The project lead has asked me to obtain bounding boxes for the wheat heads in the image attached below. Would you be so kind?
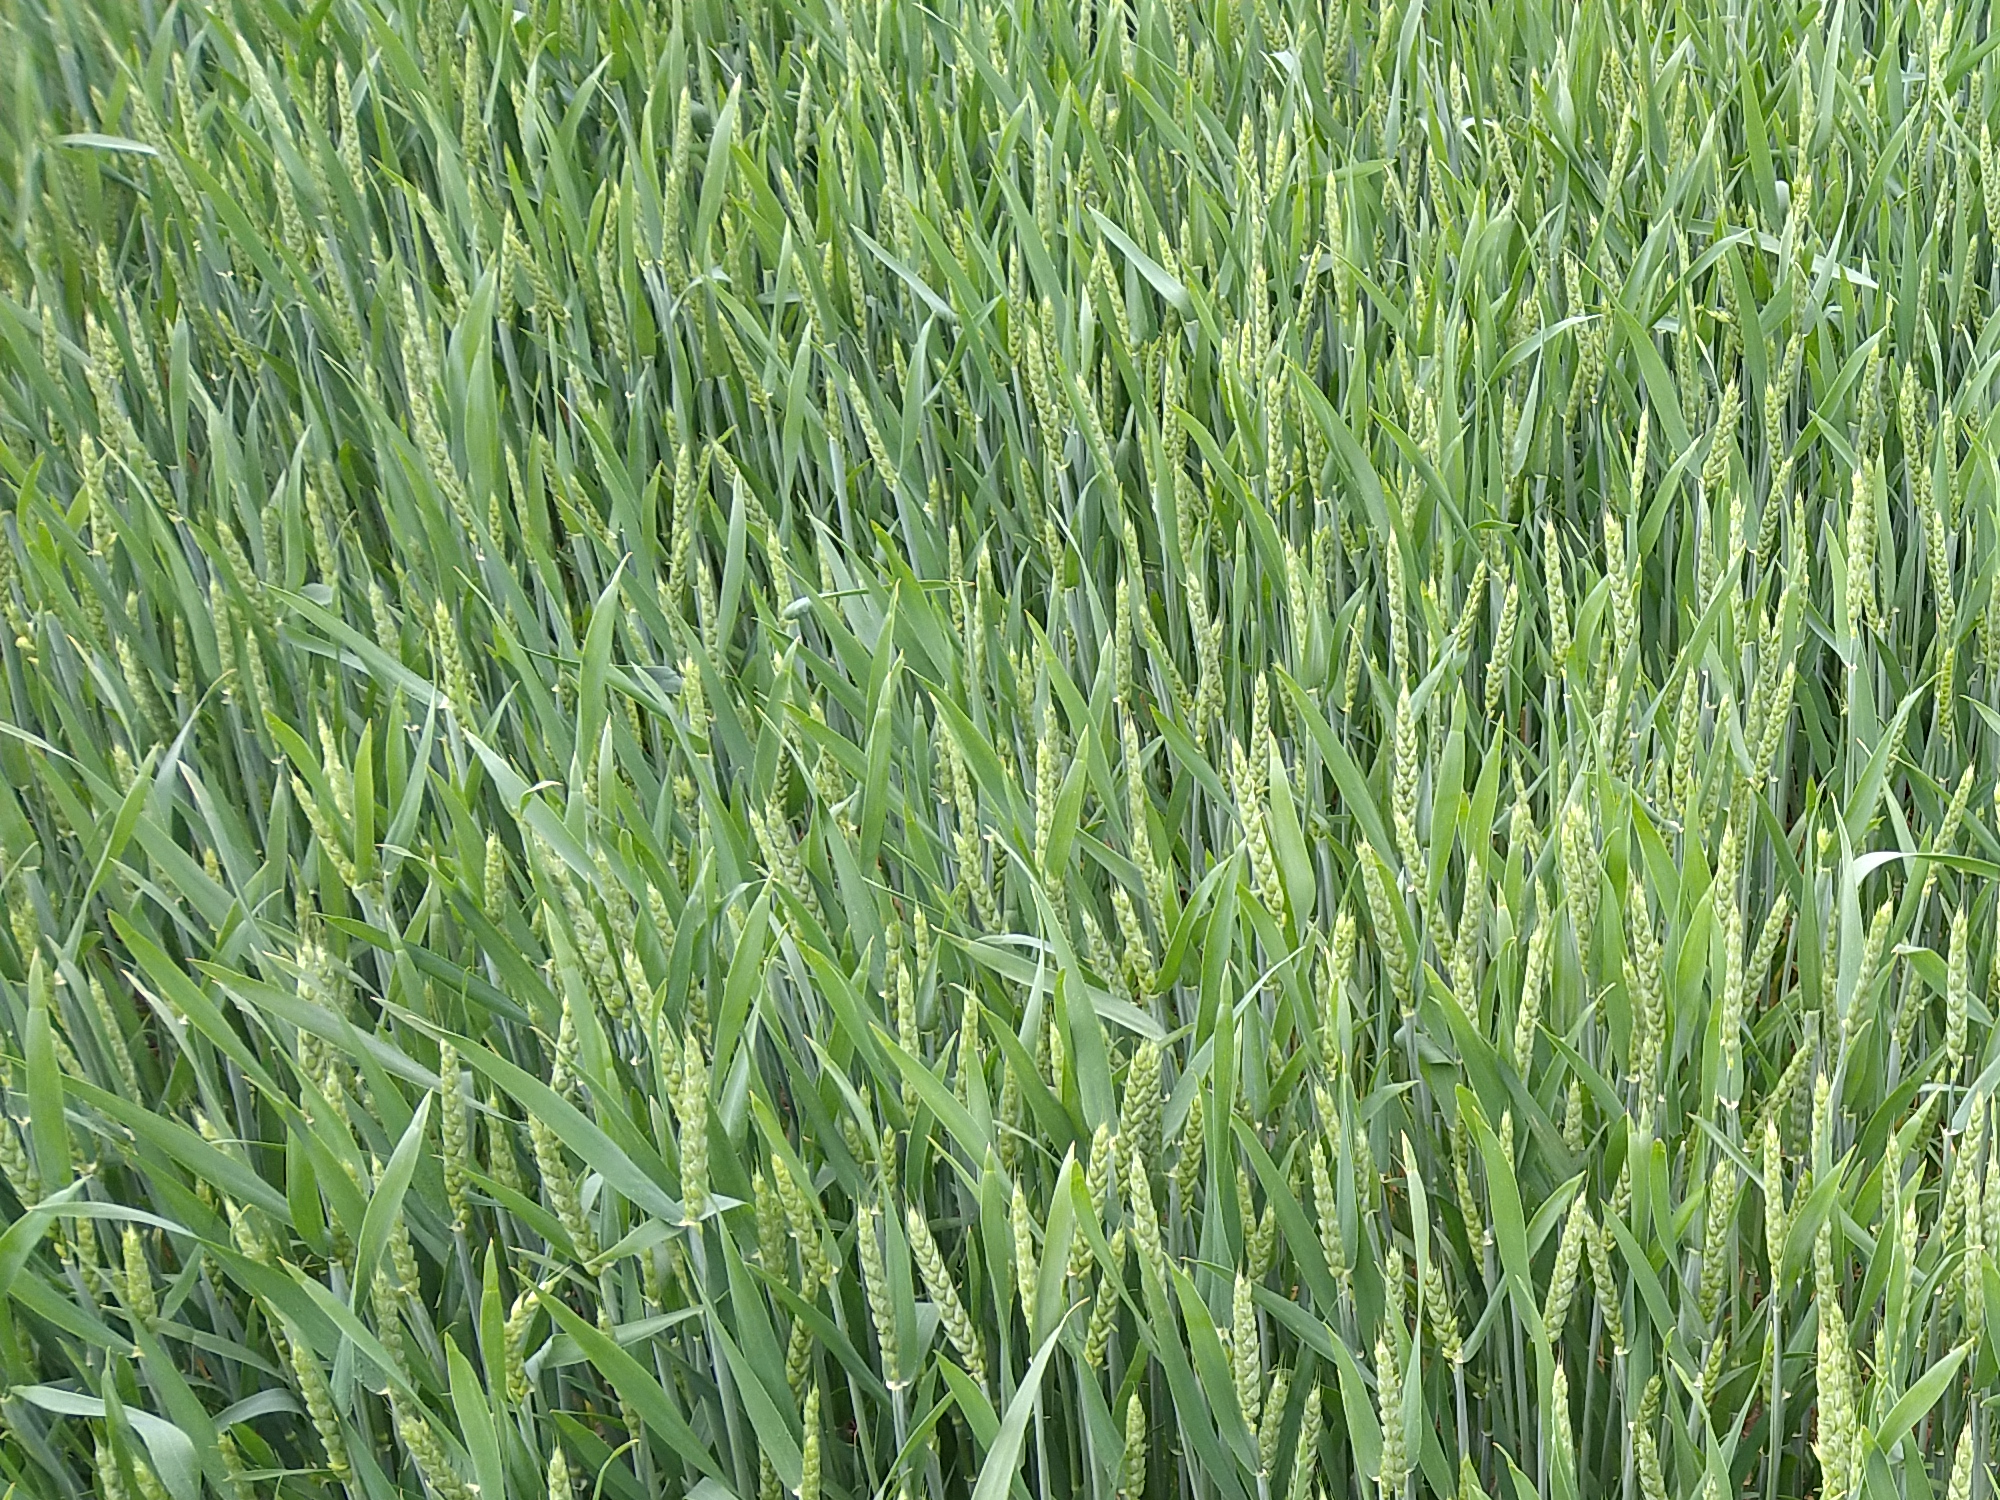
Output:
[1954,234,1978,334]
[845,1114,865,1169]
[103,160,118,256]
[571,945,602,1030]
[1588,977,1606,1026]
[1322,0,1341,93]
[1552,1365,1573,1480]
[128,587,137,634]
[1128,159,1144,251]
[1267,1040,1291,1111]
[1699,1334,1727,1404]
[13,151,24,203]
[996,94,1011,128]
[1714,154,1725,215]
[885,126,930,270]
[1534,194,1546,267]
[1114,577,1130,699]
[1697,375,1708,430]
[372,232,407,347]
[1319,979,1341,1075]
[1485,581,1520,710]
[392,560,437,632]
[914,93,933,158]
[940,107,968,187]
[48,1023,96,1106]
[25,287,39,349]
[1821,191,1831,240]
[89,87,153,234]
[1101,1024,1122,1069]
[895,962,919,1120]
[1968,72,1981,147]
[1125,715,1154,855]
[1169,35,1189,135]
[1413,874,1451,979]
[660,170,685,262]
[1039,300,1075,425]
[1934,142,1944,189]
[983,5,1005,74]
[1857,344,1879,409]
[603,199,619,269]
[1848,897,1898,1032]
[1993,840,2000,1003]
[1553,41,1565,79]
[1881,567,1884,608]
[315,234,362,364]
[1793,173,1802,202]
[926,476,941,526]
[1283,1389,1324,1500]
[1237,113,1257,185]
[1508,917,1551,1084]
[543,853,640,1040]
[1763,334,1775,383]
[1186,570,1228,709]
[1078,82,1104,200]
[1216,1329,1238,1366]
[1049,1021,1063,1090]
[1863,470,1880,626]
[1812,827,1833,856]
[49,590,80,637]
[1313,962,1331,1024]
[1913,0,1937,51]
[134,1458,207,1500]
[1084,252,1101,317]
[1785,1167,1813,1228]
[1737,806,1747,902]
[504,444,532,543]
[1579,819,1609,917]
[1636,1431,1675,1500]
[1192,687,1209,745]
[73,1186,103,1313]
[479,119,495,164]
[370,1269,416,1420]
[955,2,971,87]
[1633,1380,1662,1463]
[237,33,293,135]
[320,1033,368,1105]
[1913,261,1929,355]
[1427,234,1437,269]
[1664,274,1683,357]
[1653,762,1673,852]
[1316,1088,1342,1153]
[892,337,910,398]
[317,712,356,824]
[503,563,519,631]
[1530,73,1553,182]
[1145,158,1159,216]
[699,445,711,519]
[1721,915,1740,1059]
[1254,1376,1290,1473]
[569,362,599,421]
[642,1242,653,1301]
[1790,177,1812,259]
[1633,408,1648,511]
[535,433,566,517]
[1375,1340,1408,1484]
[489,493,506,557]
[1759,1317,1773,1409]
[1737,890,1791,1011]
[1172,1091,1206,1213]
[1539,1188,1585,1337]
[121,283,163,425]
[713,443,783,533]
[1807,233,1824,254]
[1933,1428,1977,1500]
[598,849,635,971]
[285,410,340,522]
[1608,211,1637,246]
[1412,279,1427,338]
[1489,537,1509,578]
[434,603,470,740]
[1297,22,1308,49]
[917,263,931,282]
[886,925,901,1036]
[1305,1142,1346,1284]
[1284,382,1305,497]
[1512,405,1522,434]
[1210,76,1227,124]
[1522,272,1547,337]
[308,56,330,173]
[1897,1207,1919,1367]
[1939,649,1955,736]
[570,472,607,541]
[1213,744,1232,800]
[1713,245,1746,350]
[1162,358,1187,464]
[1980,125,1999,232]
[1764,386,1780,477]
[1958,162,1969,212]
[1562,364,1582,434]
[1828,1303,1851,1354]
[1933,177,1948,220]
[1755,458,1793,567]
[1514,757,1536,834]
[1182,475,1224,550]
[1722,329,1738,382]
[1993,573,2000,679]
[1871,1332,1891,1419]
[1669,445,1685,477]
[1298,541,1307,564]
[1630,873,1668,1039]
[1843,470,1864,624]
[1866,86,1876,185]
[87,315,120,450]
[551,995,583,1142]
[1427,62,1436,82]
[842,0,855,32]
[1425,146,1449,227]
[513,235,568,309]
[8,603,46,669]
[596,252,629,375]
[1021,653,1031,693]
[1373,175,1395,262]
[1062,1122,1110,1277]
[324,172,348,237]
[1644,1030,1673,1125]
[113,745,137,790]
[760,1438,782,1500]
[1590,625,1608,691]
[1358,840,1407,1007]
[990,836,1004,914]
[41,122,91,225]
[1203,235,1220,289]
[1608,103,1631,194]
[1138,423,1155,509]
[1486,164,1503,207]
[856,1205,904,1378]
[96,1442,150,1500]
[0,538,26,610]
[1035,128,1056,245]
[11,905,58,1008]
[1983,1163,2000,1256]
[800,1392,822,1500]
[963,541,991,694]
[526,907,547,939]
[1920,424,1938,468]
[1147,337,1168,412]
[1237,324,1255,408]
[1968,402,1981,431]
[1604,1153,1634,1238]
[224,156,269,241]
[196,1110,241,1156]
[868,57,917,149]
[782,166,818,249]
[363,362,379,400]
[1286,544,1306,658]
[72,106,86,177]
[1694,1162,1735,1325]
[1897,364,1923,508]
[1512,341,1525,411]
[1009,244,1022,359]
[1269,131,1292,195]
[173,617,194,696]
[401,283,437,406]
[788,703,801,757]
[1932,763,1973,870]
[87,372,179,510]
[1014,683,1046,780]
[716,306,766,416]
[644,1,657,80]
[549,1449,576,1500]
[749,0,762,43]
[205,848,227,932]
[1018,458,1044,537]
[329,1165,360,1280]
[669,528,693,602]
[1835,62,1861,145]
[771,693,789,819]
[248,628,274,732]
[1334,911,1355,985]
[1794,492,1811,584]
[1191,52,1202,93]
[427,315,441,372]
[735,701,755,743]
[1310,526,1327,606]
[1000,587,1010,638]
[1253,0,1288,53]
[341,962,358,1025]
[797,45,818,158]
[531,251,550,335]
[1394,811,1431,901]
[461,36,480,169]
[1393,336,1413,402]
[752,810,787,903]
[1426,396,1442,467]
[97,245,122,381]
[792,251,822,337]
[413,10,440,102]
[897,254,911,329]
[1791,1045,1818,1152]
[1600,679,1622,779]
[1345,603,1367,708]
[1939,1105,1985,1242]
[1969,288,1986,337]
[666,407,683,461]
[498,207,517,319]
[846,371,895,489]
[1630,247,1639,270]
[227,1200,264,1268]
[511,78,530,155]
[1077,0,1091,59]
[1933,508,1954,623]
[1750,679,1789,783]
[291,772,357,884]
[1503,395,1517,507]
[1763,1119,1784,1284]
[952,755,978,857]
[1582,380,1592,408]
[1668,80,1689,175]
[1494,125,1521,190]
[660,256,705,344]
[1456,1159,1490,1269]
[675,777,700,905]
[1235,1278,1262,1423]
[1809,19,1824,32]
[937,359,976,433]
[1590,327,1618,428]
[1536,880,1547,921]
[1220,339,1235,363]
[441,1039,470,1214]
[320,11,335,50]
[671,1238,684,1287]
[1630,6,1649,85]
[231,96,262,183]
[487,1097,524,1188]
[1158,144,1176,223]
[1026,326,1068,462]
[413,424,479,543]
[16,1316,41,1378]
[219,313,257,370]
[1255,267,1267,377]
[249,0,285,60]
[1813,1220,1834,1337]
[1819,1336,1853,1500]
[1086,1231,1126,1366]
[1326,170,1346,311]
[100,322,125,376]
[1813,974,1841,1075]
[377,1163,422,1291]
[1682,1108,1700,1198]
[1564,1077,1586,1158]
[1730,499,1746,636]
[214,523,284,629]
[372,848,383,890]
[837,119,853,205]
[949,524,966,643]
[1402,480,1425,534]
[529,25,548,102]
[128,88,204,217]
[427,0,470,97]
[629,207,653,269]
[1011,648,1019,688]
[1457,323,1470,384]
[1610,51,1625,126]
[285,76,310,109]
[1374,79,1389,120]
[1850,1428,1867,1500]
[401,330,434,430]
[965,850,1012,931]
[0,851,27,916]
[484,829,506,917]
[1182,122,1216,172]
[466,177,489,267]
[1226,25,1235,65]
[951,224,969,310]
[1798,56,1813,181]
[399,1420,494,1500]
[1626,958,1642,1078]
[1759,611,1777,717]
[1225,744,1287,928]
[1371,6,1392,70]
[1227,0,1249,43]
[501,1284,557,1402]
[1683,141,1696,169]
[231,230,255,304]
[1598,47,1617,128]
[879,1121,898,1206]
[1910,1094,1941,1167]
[1587,216,1630,299]
[1116,8,1136,93]
[1451,60,1461,116]
[1259,1204,1276,1289]
[1332,94,1344,125]
[1942,407,1960,527]
[123,1227,158,1336]
[818,537,835,606]
[572,255,609,359]
[1116,1045,1165,1195]
[1066,620,1080,676]
[873,186,889,271]
[1431,724,1439,775]
[1325,534,1337,600]
[856,1082,871,1120]
[1543,931,1556,980]
[1037,865,1071,943]
[1406,120,1425,210]
[955,989,978,1110]
[1175,485,1193,566]
[775,333,787,380]
[1125,521,1152,601]
[629,190,655,245]
[1170,1,1187,45]
[368,23,414,115]
[646,881,706,1040]
[1236,1168,1256,1256]
[1075,374,1116,478]
[925,164,954,251]
[1435,305,1447,389]
[1938,1263,1969,1325]
[1822,906,1842,983]
[776,1266,824,1385]
[294,943,321,1081]
[1928,35,1939,103]
[322,1067,346,1138]
[1296,245,1323,346]
[751,1174,791,1293]
[980,100,989,131]
[1656,52,1665,111]
[1449,857,1485,971]
[84,8,111,74]
[1128,853,1171,945]
[1964,1186,1985,1328]
[1396,463,1405,498]
[1387,529,1404,675]
[948,880,971,903]
[826,369,842,442]
[1290,761,1312,808]
[1878,1135,1899,1219]
[998,1068,1021,1155]
[1494,63,1516,124]
[42,193,98,280]
[1680,329,1696,435]
[1997,142,2000,244]
[1502,1108,1511,1173]
[1911,123,1933,198]
[559,0,581,56]
[684,666,710,737]
[1556,757,1570,817]
[319,459,352,537]
[673,442,694,553]
[1095,238,1131,339]
[220,1432,258,1500]
[1129,1153,1167,1302]
[532,1110,598,1255]
[117,640,179,745]
[1618,711,1631,775]
[766,532,796,609]
[1700,521,1711,620]
[1874,703,1914,810]
[1605,132,1615,170]
[83,570,120,672]
[1453,960,1478,1023]
[259,1305,293,1359]
[1870,410,1883,464]
[1033,699,1056,868]
[635,976,688,1117]
[1247,187,1260,313]
[1300,394,1331,489]
[1563,254,1592,372]
[847,248,868,346]
[1863,57,1872,79]
[1788,256,1806,329]
[628,621,651,664]
[768,809,832,942]
[1543,522,1570,663]
[1110,885,1151,999]
[197,306,234,368]
[131,110,166,191]
[862,0,879,43]
[1033,641,1045,677]
[39,27,73,124]
[930,709,951,800]
[1267,379,1282,509]
[671,89,690,186]
[1181,218,1191,278]
[747,41,767,108]
[1956,109,1971,151]
[914,907,936,986]
[1137,607,1194,716]
[89,973,137,1082]
[261,506,281,609]
[1084,916,1130,1004]
[905,1206,985,1375]
[1542,405,1553,473]
[618,688,640,741]
[294,1338,351,1472]
[144,307,171,371]
[730,104,754,258]
[772,1152,840,1266]
[1664,649,1687,757]
[1673,671,1697,808]
[41,306,67,458]
[23,227,61,304]
[1337,7,1350,66]
[1734,760,1749,832]
[1409,385,1429,442]
[680,1031,709,1215]
[1100,110,1119,175]
[1602,509,1629,662]
[368,583,400,664]
[723,214,741,300]
[1741,1041,1813,1153]
[1052,458,1064,508]
[1295,116,1309,196]
[318,946,334,1014]
[1331,501,1358,556]
[556,669,577,727]
[1265,106,1275,189]
[1011,1181,1039,1328]
[1939,6,1952,55]
[1246,672,1268,810]
[1583,1217,1621,1341]
[1705,384,1742,487]
[203,582,251,721]
[594,1305,639,1443]
[0,1115,64,1238]
[1740,591,1789,758]
[1975,604,1989,659]
[619,581,639,620]
[1599,300,1613,345]
[1422,1265,1463,1356]
[820,242,833,293]
[1041,520,1066,596]
[1855,397,1878,453]
[695,559,721,662]
[419,191,468,311]
[1386,1248,1403,1344]
[849,35,862,113]
[25,743,89,850]
[1679,238,1688,284]
[656,583,691,669]
[512,22,548,101]
[1279,673,1314,767]
[1127,1389,1145,1496]
[1453,559,1486,653]
[1560,811,1591,975]
[1460,1471,1477,1500]
[304,482,339,589]
[172,53,207,166]
[1367,103,1384,155]
[335,63,363,190]
[1392,683,1416,815]
[0,260,16,301]
[1701,701,1733,833]
[1944,902,1968,1067]
[952,34,980,82]
[1813,1070,1830,1147]
[214,0,235,38]
[1896,969,1920,1053]
[1158,232,1182,282]
[274,158,309,301]
[811,715,847,829]
[5,426,35,471]
[1776,334,1804,407]
[1704,823,1737,938]
[1100,350,1116,440]
[191,1186,219,1298]
[164,249,219,372]
[1306,331,1323,384]
[1921,468,1936,584]
[81,434,109,565]
[1358,1124,1369,1209]
[588,739,603,827]
[1942,111,1958,146]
